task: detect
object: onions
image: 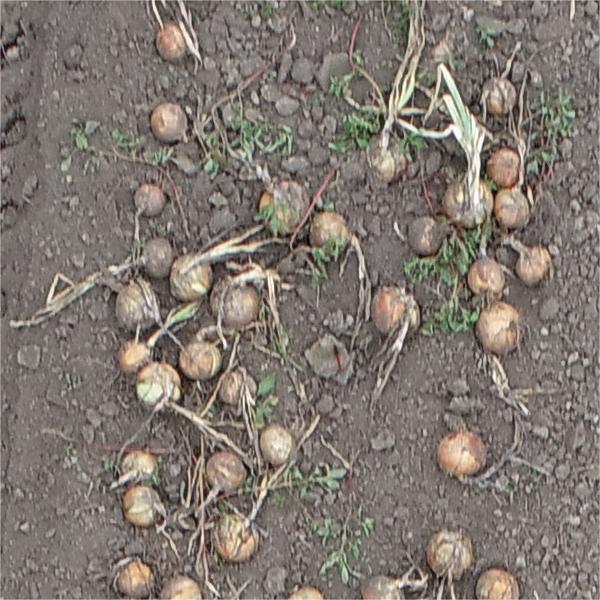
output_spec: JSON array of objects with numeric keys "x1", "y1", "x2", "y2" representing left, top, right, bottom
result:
[
  {"x1": 360, "y1": 572, "x2": 399, "y2": 599},
  {"x1": 147, "y1": 101, "x2": 185, "y2": 141},
  {"x1": 479, "y1": 77, "x2": 515, "y2": 114},
  {"x1": 372, "y1": 288, "x2": 418, "y2": 332},
  {"x1": 466, "y1": 257, "x2": 506, "y2": 295},
  {"x1": 475, "y1": 303, "x2": 521, "y2": 352},
  {"x1": 179, "y1": 341, "x2": 219, "y2": 378},
  {"x1": 404, "y1": 215, "x2": 445, "y2": 255},
  {"x1": 492, "y1": 188, "x2": 529, "y2": 226},
  {"x1": 515, "y1": 245, "x2": 550, "y2": 282},
  {"x1": 169, "y1": 260, "x2": 212, "y2": 299},
  {"x1": 261, "y1": 184, "x2": 305, "y2": 231},
  {"x1": 204, "y1": 451, "x2": 244, "y2": 492},
  {"x1": 216, "y1": 371, "x2": 251, "y2": 408},
  {"x1": 439, "y1": 178, "x2": 493, "y2": 225},
  {"x1": 425, "y1": 529, "x2": 474, "y2": 572},
  {"x1": 289, "y1": 584, "x2": 325, "y2": 599},
  {"x1": 134, "y1": 184, "x2": 165, "y2": 215},
  {"x1": 473, "y1": 566, "x2": 519, "y2": 599},
  {"x1": 121, "y1": 485, "x2": 159, "y2": 525},
  {"x1": 116, "y1": 280, "x2": 160, "y2": 328},
  {"x1": 161, "y1": 572, "x2": 201, "y2": 599},
  {"x1": 121, "y1": 449, "x2": 156, "y2": 482},
  {"x1": 255, "y1": 425, "x2": 292, "y2": 464},
  {"x1": 133, "y1": 365, "x2": 179, "y2": 408},
  {"x1": 218, "y1": 281, "x2": 260, "y2": 324},
  {"x1": 154, "y1": 24, "x2": 186, "y2": 61},
  {"x1": 365, "y1": 138, "x2": 405, "y2": 181},
  {"x1": 112, "y1": 557, "x2": 156, "y2": 595},
  {"x1": 117, "y1": 337, "x2": 151, "y2": 369},
  {"x1": 141, "y1": 237, "x2": 174, "y2": 277},
  {"x1": 213, "y1": 512, "x2": 259, "y2": 559},
  {"x1": 436, "y1": 429, "x2": 484, "y2": 475},
  {"x1": 484, "y1": 148, "x2": 522, "y2": 187},
  {"x1": 311, "y1": 211, "x2": 349, "y2": 252}
]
